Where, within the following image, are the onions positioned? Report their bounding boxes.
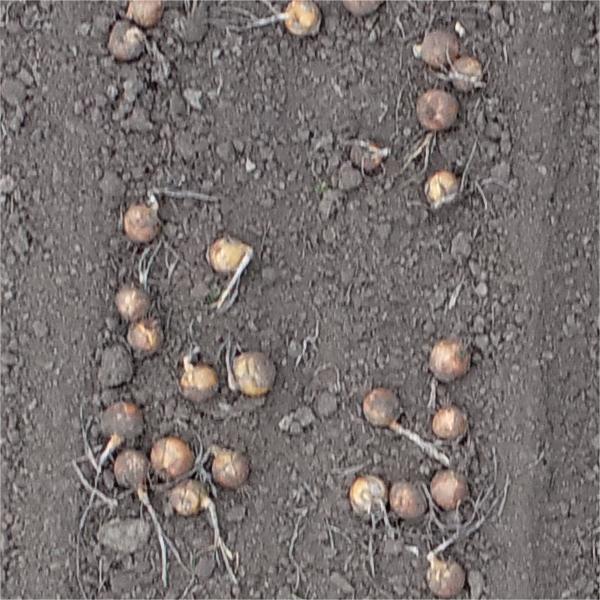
[447,55,480,82]
[169,481,205,514]
[359,386,399,425]
[230,352,273,394]
[101,400,143,442]
[343,0,380,18]
[423,556,464,593]
[386,479,428,519]
[209,446,249,487]
[348,475,385,513]
[120,202,156,242]
[206,237,246,272]
[151,435,193,476]
[125,317,161,352]
[279,1,320,35]
[112,452,152,496]
[428,337,468,379]
[429,469,466,509]
[123,0,160,27]
[420,167,457,205]
[108,22,143,59]
[415,89,458,130]
[181,362,218,395]
[114,282,149,318]
[419,27,456,67]
[429,404,464,440]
